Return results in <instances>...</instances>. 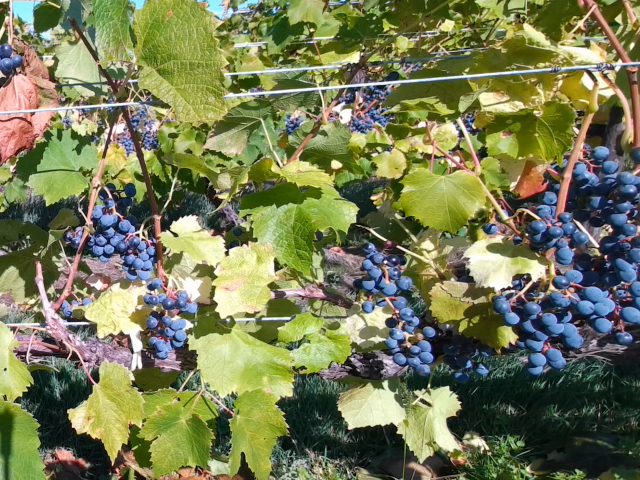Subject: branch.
Masks as SVG:
<instances>
[{
    "label": "branch",
    "instance_id": "3",
    "mask_svg": "<svg viewBox=\"0 0 640 480\" xmlns=\"http://www.w3.org/2000/svg\"><path fill=\"white\" fill-rule=\"evenodd\" d=\"M121 113L124 119V122L126 123V126L129 130L130 136H131V140L133 141V145L136 149V153L137 156L139 158L140 164L142 165V169H143V175H144V179H145V187H146V191L149 197L150 202L152 203V215L155 216L156 218L154 219V229H155V233L159 234L161 231V214H160V209L158 207V204L156 203V199L154 197L151 185H150V176H149V172H148V167H147V162L144 159L141 147L139 145V142L137 140L136 137V133L135 130L133 128V125L128 117V113L126 108L121 109Z\"/></svg>",
    "mask_w": 640,
    "mask_h": 480
},
{
    "label": "branch",
    "instance_id": "6",
    "mask_svg": "<svg viewBox=\"0 0 640 480\" xmlns=\"http://www.w3.org/2000/svg\"><path fill=\"white\" fill-rule=\"evenodd\" d=\"M486 197L488 199V202L499 212V214L502 216L503 220L507 224L513 227L517 231V233L520 234L521 236L526 235V232L523 231L522 228L516 222L512 221L504 212V209L495 200H493V197L490 192L486 193Z\"/></svg>",
    "mask_w": 640,
    "mask_h": 480
},
{
    "label": "branch",
    "instance_id": "8",
    "mask_svg": "<svg viewBox=\"0 0 640 480\" xmlns=\"http://www.w3.org/2000/svg\"><path fill=\"white\" fill-rule=\"evenodd\" d=\"M102 73L104 74L105 80L109 83L110 88L112 89V92L114 94L118 93L117 87L115 86V83L113 81V79L110 77V74L108 72L107 69H103Z\"/></svg>",
    "mask_w": 640,
    "mask_h": 480
},
{
    "label": "branch",
    "instance_id": "7",
    "mask_svg": "<svg viewBox=\"0 0 640 480\" xmlns=\"http://www.w3.org/2000/svg\"><path fill=\"white\" fill-rule=\"evenodd\" d=\"M71 23H72L73 29L75 31H77V33L83 38V41L85 42V45H86V47H87V49L89 51V54H90L91 58L93 59V61L97 62L98 61V57H97L96 53L94 52V48H93L88 36L82 30V28L80 26H78L76 19H72Z\"/></svg>",
    "mask_w": 640,
    "mask_h": 480
},
{
    "label": "branch",
    "instance_id": "5",
    "mask_svg": "<svg viewBox=\"0 0 640 480\" xmlns=\"http://www.w3.org/2000/svg\"><path fill=\"white\" fill-rule=\"evenodd\" d=\"M586 2L590 6V8L593 11L594 15L596 16L597 22L599 24H601L603 32L610 39V41L612 43V46L617 51V53L620 55L621 61H631V58L629 57V53L626 52L622 48V46L620 45V42L617 39L616 35L614 34L613 30L610 28V26L608 25L607 21L604 19L603 13L600 10H598V8L596 7L594 1L593 0H586Z\"/></svg>",
    "mask_w": 640,
    "mask_h": 480
},
{
    "label": "branch",
    "instance_id": "2",
    "mask_svg": "<svg viewBox=\"0 0 640 480\" xmlns=\"http://www.w3.org/2000/svg\"><path fill=\"white\" fill-rule=\"evenodd\" d=\"M592 119H593V112L589 111L585 117L582 129L577 135L575 145L572 148V151L569 155L568 163L563 170V175L560 178V194L557 197V205L555 206L556 214H560L564 212L565 201L570 195L571 186L573 183L572 171H573L574 161L576 160L579 150L584 140L586 139L587 132L592 122Z\"/></svg>",
    "mask_w": 640,
    "mask_h": 480
},
{
    "label": "branch",
    "instance_id": "1",
    "mask_svg": "<svg viewBox=\"0 0 640 480\" xmlns=\"http://www.w3.org/2000/svg\"><path fill=\"white\" fill-rule=\"evenodd\" d=\"M117 119L113 118L110 122V124L108 125L109 128V132H108V137L104 143V146L102 148L100 157H99V161H98V166H97V170L94 176V180L92 183V187L90 190V199H89V205L88 208L86 210V227L85 230L83 231L82 235H81V239L80 242L78 243V250L75 252V259H74V263L72 265V268L69 271L64 289L61 293V295L54 301V303L51 306V309L53 311H56L60 305L65 301V299L69 296V293L72 289V285L74 283V279L75 276L80 268L81 262H82V255L84 254V250H83V246L86 242V238L88 236V234L90 233V229H91V217H92V210L94 207V202H95V192L97 190V186H98V182L101 176V172H102V168H103V164H104V160H105V156L107 153V150L109 148V145L113 139V135H114V130H115V125H116Z\"/></svg>",
    "mask_w": 640,
    "mask_h": 480
},
{
    "label": "branch",
    "instance_id": "4",
    "mask_svg": "<svg viewBox=\"0 0 640 480\" xmlns=\"http://www.w3.org/2000/svg\"><path fill=\"white\" fill-rule=\"evenodd\" d=\"M628 73V81L631 89V108L633 113V130L632 141L636 148L640 147V97L638 94V81L639 75L638 67L631 66L626 68Z\"/></svg>",
    "mask_w": 640,
    "mask_h": 480
}]
</instances>
